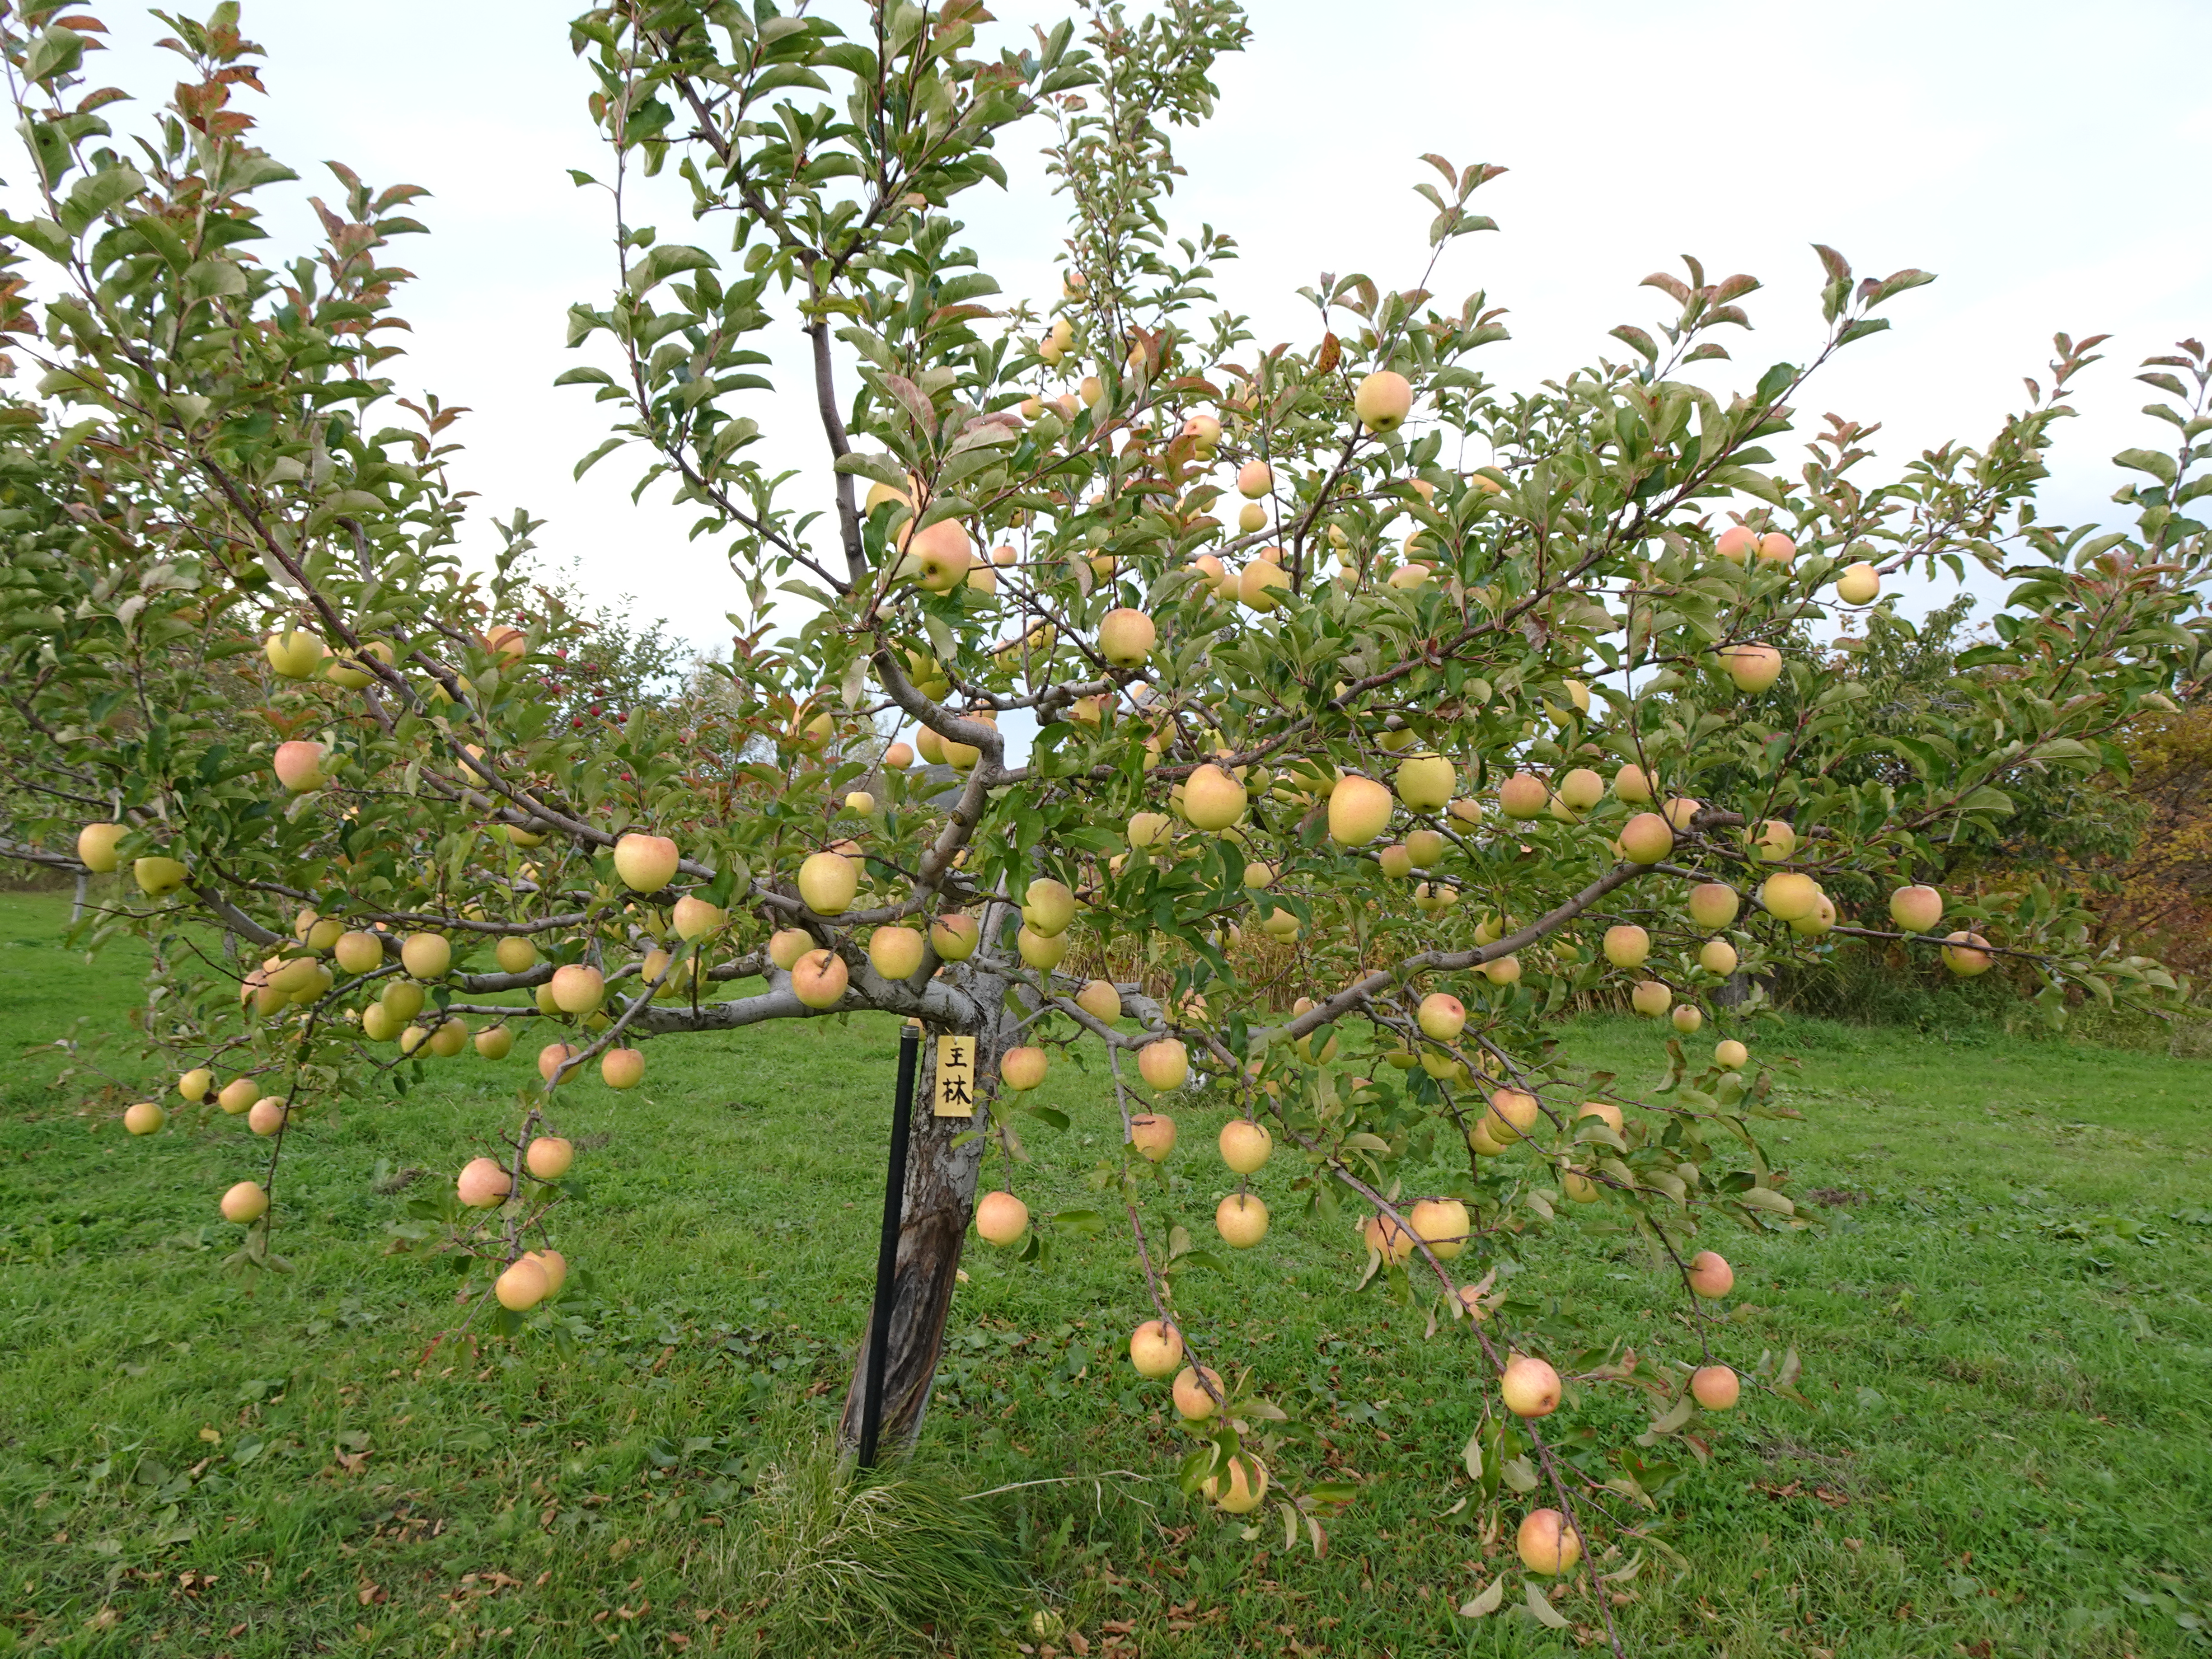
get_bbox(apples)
[277,1049,298,1071]
[1789,891,1837,936]
[976,1190,1028,1246]
[552,962,607,1014]
[1445,799,1486,834]
[1574,1425,1599,1449]
[1139,422,1163,446]
[681,954,713,989]
[1318,765,1347,795]
[1173,1364,1225,1420]
[1200,749,1246,783]
[1551,930,1583,962]
[1379,720,1419,759]
[456,740,503,788]
[1188,436,1223,460]
[274,741,332,792]
[1072,981,1122,1030]
[495,936,537,974]
[1486,955,1522,986]
[1351,709,1377,735]
[1163,987,1211,1034]
[484,625,525,663]
[640,948,688,1000]
[1691,1366,1740,1411]
[1292,994,1321,1023]
[928,912,981,964]
[1193,689,1241,730]
[1709,638,1743,674]
[1501,1357,1562,1419]
[1189,865,1222,900]
[1515,840,1545,871]
[364,1002,410,1042]
[429,1016,469,1057]
[1131,708,1179,746]
[1066,885,1097,910]
[1127,810,1173,856]
[1019,921,1070,969]
[1203,1049,1231,1072]
[1562,1163,1606,1203]
[1109,848,1141,884]
[1467,1113,1511,1156]
[1385,1031,1420,1069]
[263,941,317,993]
[768,926,816,971]
[865,472,936,543]
[973,63,1022,105]
[267,630,323,679]
[403,854,436,887]
[951,847,975,869]
[1402,529,1444,564]
[1672,1003,1701,1033]
[1486,1103,1521,1146]
[1194,554,1226,591]
[1404,828,1444,870]
[1699,940,1738,977]
[248,1096,291,1137]
[220,1078,259,1114]
[1359,893,1380,914]
[1333,471,1363,500]
[1262,859,1294,886]
[1276,914,1299,947]
[1216,1192,1268,1249]
[935,559,997,608]
[1613,762,1658,806]
[1437,885,1467,906]
[220,1180,271,1225]
[275,689,308,718]
[303,1094,326,1114]
[553,935,599,968]
[884,741,915,770]
[1420,1035,1465,1080]
[1468,958,1496,981]
[1018,875,1077,940]
[1288,788,1317,808]
[1129,1319,1185,1377]
[1242,864,1277,891]
[1943,931,1995,977]
[1659,797,1704,836]
[475,1023,513,1061]
[602,916,645,943]
[344,1005,368,1027]
[400,932,452,979]
[1300,677,1347,724]
[882,638,934,690]
[1365,417,1396,443]
[1298,1027,1338,1067]
[1572,740,1602,774]
[1190,1461,1227,1498]
[495,1258,548,1313]
[342,805,365,828]
[1238,558,1288,612]
[1290,759,1329,791]
[1158,785,1197,827]
[1633,980,1671,1017]
[1347,1075,1381,1111]
[1469,464,1505,500]
[1534,945,1563,977]
[931,965,958,996]
[1069,273,1092,304]
[1459,1046,1501,1087]
[769,688,793,716]
[295,907,347,950]
[134,845,189,895]
[1053,318,1084,352]
[1603,924,1650,968]
[1407,1193,1470,1259]
[422,665,476,712]
[1712,525,1759,572]
[1741,819,1797,862]
[1401,476,1436,511]
[1335,563,1369,593]
[380,980,426,1023]
[1258,545,1289,569]
[1072,694,1119,734]
[1130,684,1164,716]
[1005,504,1037,530]
[1419,991,1466,1040]
[1328,510,1375,549]
[1074,858,1111,891]
[1503,712,1536,743]
[1000,1045,1050,1092]
[941,716,999,772]
[1756,530,1797,572]
[1488,1087,1538,1136]
[601,1048,644,1090]
[1482,908,1514,938]
[299,1062,328,1087]
[844,790,876,819]
[1259,893,1302,934]
[1135,851,1160,877]
[1606,820,1642,857]
[335,931,383,974]
[432,890,464,912]
[1714,1038,1748,1072]
[1385,562,1437,608]
[526,1136,574,1179]
[1182,762,1250,833]
[538,1044,583,1086]
[1219,573,1247,602]
[282,960,334,1006]
[1271,773,1297,803]
[672,895,734,948]
[1197,728,1238,757]
[868,923,926,980]
[1688,882,1740,928]
[921,818,941,834]
[1232,423,1258,443]
[903,1007,933,1042]
[77,821,137,875]
[968,697,999,725]
[456,1156,514,1210]
[1549,787,1588,827]
[1473,922,1516,948]
[1175,834,1203,857]
[791,948,850,1010]
[1243,1384,1272,1421]
[1455,1286,1494,1323]
[1890,884,1944,933]
[400,1024,435,1058]
[179,1068,219,1105]
[809,684,844,709]
[1112,733,1163,772]
[1302,868,1343,898]
[240,968,292,1018]
[532,775,554,796]
[1232,383,1272,422]
[1394,752,1455,815]
[1575,1097,1624,1145]
[822,837,868,878]
[787,703,834,754]
[1711,705,1735,730]
[1379,843,1414,878]
[1108,478,1137,504]
[1056,393,1084,420]
[1059,777,1093,803]
[1799,880,1828,905]
[1414,883,1447,912]
[124,1101,164,1138]
[1354,371,1414,429]
[1139,1037,1190,1091]
[1181,415,1221,451]
[287,1012,314,1045]
[614,831,680,894]
[318,641,394,692]
[1088,494,1114,521]
[992,545,1016,568]
[932,16,975,51]
[1326,773,1393,845]
[1559,768,1606,813]
[897,513,972,591]
[1515,1507,1581,1576]
[798,851,858,916]
[1498,771,1552,822]
[1238,762,1270,794]
[1098,607,1156,670]
[375,910,407,935]
[1128,338,1162,376]
[517,860,549,888]
[1464,725,1491,748]
[535,979,566,1016]
[1237,502,1267,534]
[1218,1120,1272,1175]
[1209,922,1241,951]
[1551,496,1585,537]
[1337,539,1369,569]
[1633,565,1668,598]
[994,639,1030,672]
[915,721,967,765]
[918,657,957,704]
[1024,618,1058,650]
[884,873,921,908]
[1763,870,1819,920]
[622,900,659,929]
[1081,376,1116,407]
[1020,393,1045,421]
[1195,488,1219,514]
[1087,548,1120,580]
[1128,1112,1179,1168]
[1166,495,1200,525]
[1209,1449,1271,1514]
[1558,660,1586,687]
[1836,563,1881,607]
[1731,641,1781,692]
[1251,736,1282,765]
[1688,1250,1734,1301]
[1244,1060,1290,1107]
[1542,676,1592,729]
[508,813,548,848]
[1102,667,1122,689]
[1038,337,1064,368]
[1352,970,1396,1007]
[459,902,490,927]
[1618,813,1672,865]
[1364,1213,1414,1269]
[577,1001,610,1035]
[1236,459,1276,499]
[518,1247,565,1300]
